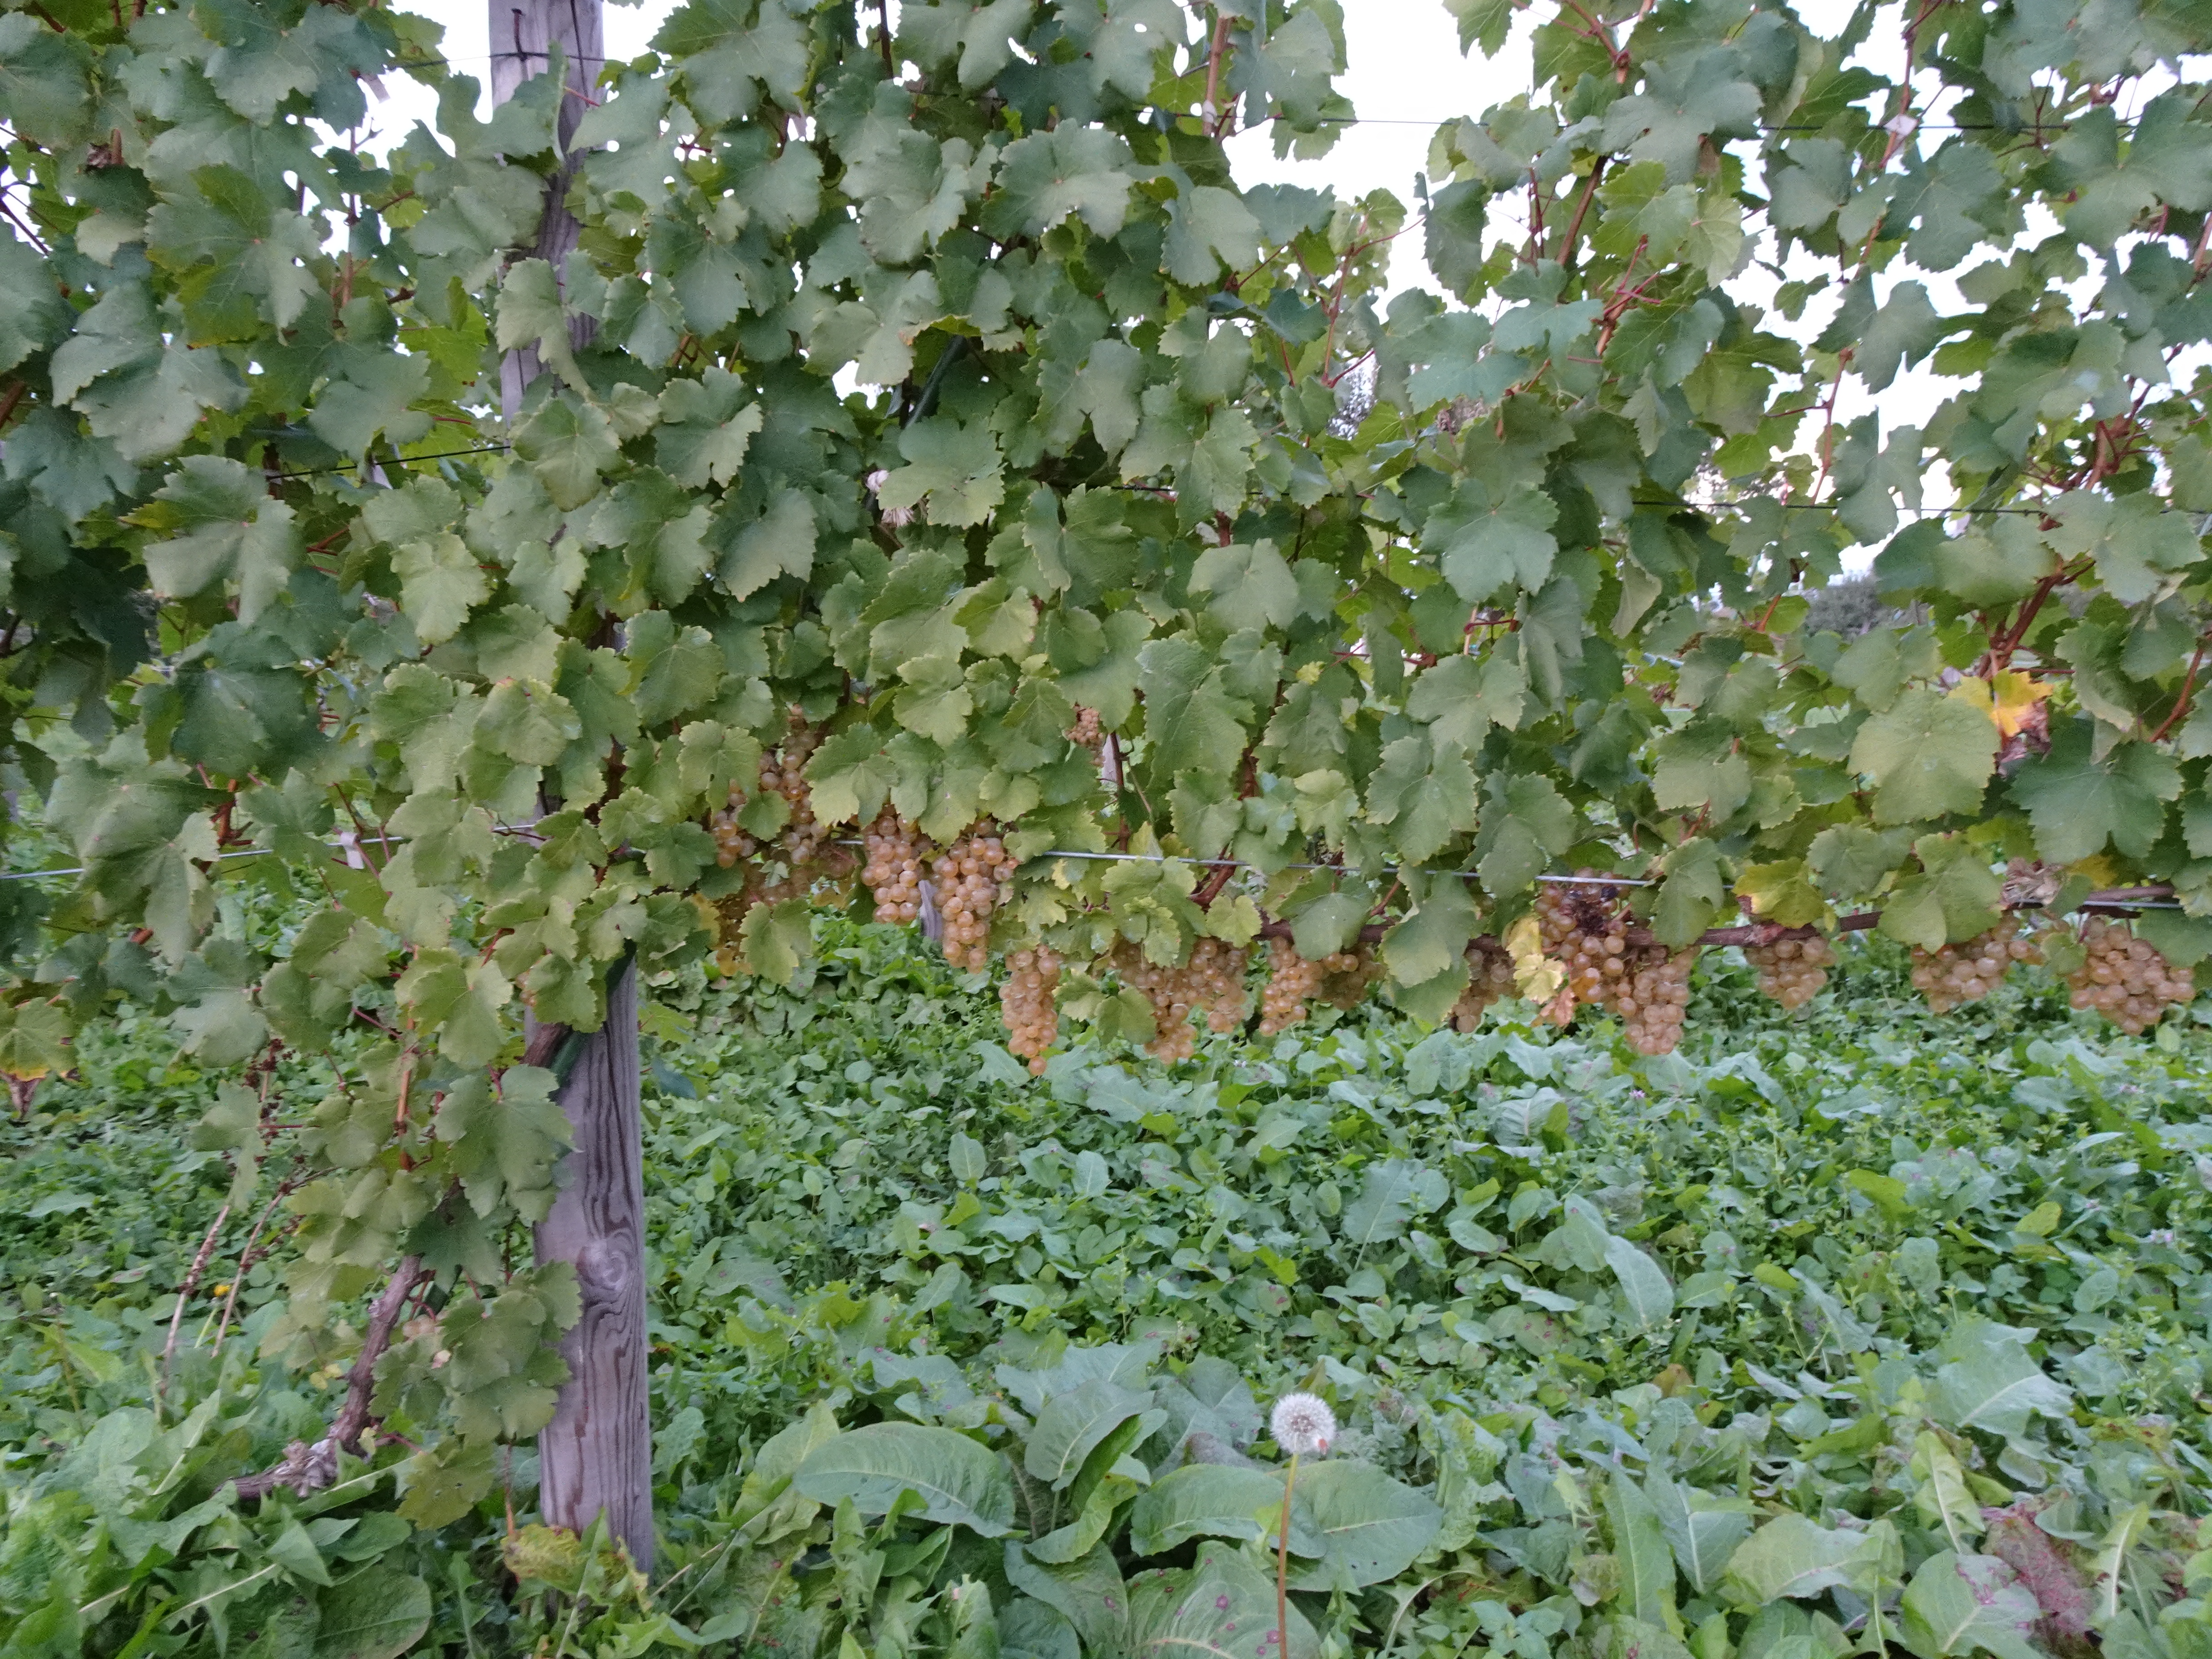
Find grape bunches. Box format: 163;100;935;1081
714;860;808;960
1909;915;2051;1014
1113;938;1199;1063
761;837;856;909
1180;935;1253;1032
1315;946;1385;1011
1067;706;1107;767
1258;936;1322;1038
929;820;1013;974
1447;948;1524;1033
1533;867;1625;1002
705;773;754;867
759;705;817;795
2064;916;2197;1038
999;944;1060;1076
1743;935;1838;1009
1584;956;1690;1058
848;803;931;929
780;793;832;864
